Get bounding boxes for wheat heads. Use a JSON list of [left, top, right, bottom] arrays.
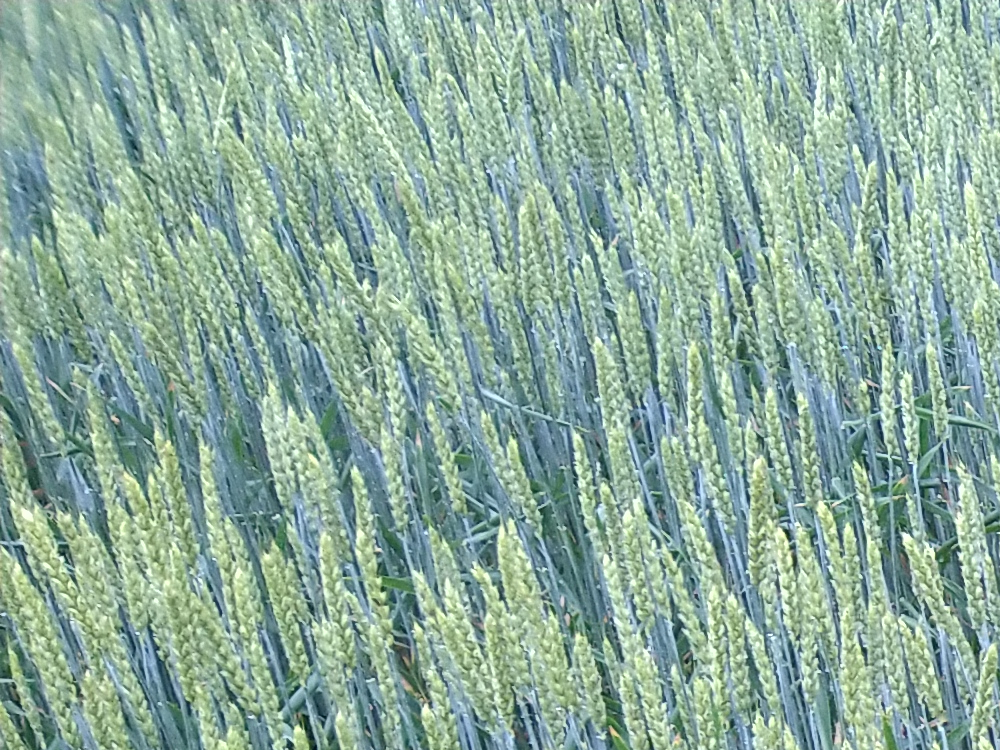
[[614, 421, 644, 508], [372, 349, 385, 410], [607, 242, 623, 287], [638, 177, 654, 215], [889, 242, 915, 331], [564, 17, 576, 86], [88, 122, 119, 201], [882, 616, 911, 718], [608, 356, 628, 422], [951, 241, 970, 312], [195, 688, 224, 750], [339, 305, 369, 381], [72, 87, 89, 167], [19, 0, 40, 52], [830, 223, 858, 303], [550, 81, 574, 157], [923, 167, 939, 223], [507, 440, 543, 534], [207, 319, 230, 356], [835, 20, 856, 71], [937, 65, 947, 104], [308, 281, 329, 342], [707, 143, 729, 199], [243, 257, 258, 311], [333, 232, 355, 272], [301, 175, 316, 227], [121, 85, 151, 157], [85, 379, 118, 457], [889, 168, 912, 249], [354, 466, 374, 549], [753, 289, 779, 375], [759, 94, 768, 127], [723, 0, 738, 53], [698, 422, 733, 525], [676, 504, 700, 585], [523, 41, 548, 118], [867, 541, 889, 614], [410, 54, 423, 102], [335, 713, 363, 750], [601, 33, 618, 76], [593, 0, 607, 33], [394, 172, 422, 221], [265, 104, 296, 170], [103, 13, 125, 67], [773, 529, 798, 636], [709, 295, 724, 381], [622, 171, 637, 207], [660, 434, 678, 502], [378, 343, 408, 437], [223, 122, 276, 211], [726, 599, 752, 718], [506, 0, 522, 30], [185, 0, 213, 64], [607, 415, 631, 511], [2, 581, 34, 662], [458, 199, 481, 292], [188, 73, 216, 143], [659, 286, 675, 405], [299, 0, 321, 47], [172, 232, 210, 317], [757, 180, 770, 238], [332, 339, 349, 378], [577, 104, 603, 181], [375, 22, 391, 64], [304, 412, 338, 483], [214, 227, 249, 293], [266, 19, 279, 48], [899, 0, 916, 21], [50, 74, 75, 130], [381, 429, 408, 528], [818, 67, 827, 132], [473, 566, 502, 614], [679, 124, 697, 186], [148, 477, 171, 564], [391, 232, 413, 298], [789, 112, 800, 158], [52, 115, 91, 210], [241, 39, 266, 96], [901, 534, 944, 623], [167, 24, 193, 109], [213, 56, 242, 145], [643, 0, 668, 52], [83, 248, 115, 327], [420, 17, 444, 54], [855, 648, 885, 736], [590, 339, 623, 430], [956, 27, 978, 87], [798, 394, 822, 502], [53, 211, 91, 323], [817, 503, 851, 607], [296, 93, 320, 172], [226, 517, 264, 622], [928, 346, 948, 437], [881, 346, 899, 456], [55, 11, 75, 67], [543, 0, 562, 42], [392, 37, 407, 91], [583, 253, 606, 331], [748, 410, 758, 435], [925, 112, 937, 171], [92, 680, 146, 750], [200, 444, 232, 581], [909, 68, 923, 143], [341, 155, 362, 206], [191, 631, 220, 680], [955, 515, 986, 626], [646, 29, 661, 92], [159, 440, 198, 557], [422, 78, 431, 105], [852, 142, 881, 221], [414, 624, 448, 717], [811, 585, 839, 659], [234, 67, 261, 128], [370, 628, 402, 731], [479, 220, 501, 307], [572, 434, 595, 503], [957, 469, 985, 549], [877, 0, 895, 47], [906, 27, 926, 82], [360, 141, 376, 189], [534, 184, 575, 300], [768, 9, 789, 68], [636, 656, 672, 750], [352, 84, 362, 142], [632, 0, 645, 31], [518, 208, 537, 309], [69, 152, 101, 220], [176, 3, 190, 44], [689, 180, 709, 267], [540, 111, 554, 157], [481, 414, 518, 506], [411, 571, 440, 643], [926, 212, 955, 305], [201, 134, 230, 195], [318, 119, 341, 184], [900, 619, 928, 701], [316, 341, 366, 434], [742, 73, 760, 157], [719, 293, 734, 353], [605, 0, 619, 34], [559, 79, 585, 159], [59, 515, 118, 619], [665, 104, 682, 164], [943, 134, 963, 209], [754, 254, 771, 296], [107, 632, 162, 750], [376, 150, 394, 210], [804, 133, 816, 182], [484, 605, 512, 723], [299, 500, 325, 552], [384, 0, 412, 49], [427, 0, 446, 37], [430, 221, 451, 299], [428, 69, 450, 174], [233, 326, 260, 397], [875, 62, 891, 148], [558, 0, 584, 29], [291, 12, 313, 77], [584, 1, 597, 56], [731, 193, 745, 234], [786, 34, 804, 84], [459, 0, 475, 19], [819, 133, 836, 203], [97, 235, 131, 315], [456, 12, 474, 65], [901, 374, 920, 460], [405, 0, 424, 40], [467, 74, 494, 175], [428, 44, 438, 83], [956, 658, 970, 703], [975, 304, 995, 400], [746, 620, 782, 716], [239, 120, 259, 163], [604, 182, 630, 256], [288, 202, 321, 270], [510, 524, 545, 606], [105, 202, 132, 255], [967, 0, 987, 40], [91, 99, 107, 142], [793, 270, 814, 364], [865, 58, 881, 129], [697, 12, 720, 85], [673, 309, 683, 370], [147, 578, 191, 697], [220, 137, 232, 191], [783, 109, 793, 158], [721, 373, 742, 463], [900, 138, 920, 187], [621, 521, 655, 623], [281, 92, 300, 139], [341, 16, 353, 50], [601, 559, 640, 665], [866, 610, 892, 703], [126, 257, 173, 347], [773, 75, 782, 119], [792, 0, 814, 76], [336, 182, 364, 249], [942, 114, 954, 165], [697, 62, 716, 128], [121, 212, 153, 289], [115, 174, 164, 250], [750, 716, 767, 750], [452, 97, 490, 196], [683, 504, 726, 596], [632, 215, 654, 285], [331, 252, 399, 354], [831, 76, 852, 173], [759, 41, 766, 90], [21, 510, 91, 621], [572, 28, 601, 97], [141, 13, 169, 106], [795, 162, 820, 255], [159, 256, 188, 341], [968, 125, 991, 181], [247, 635, 282, 747], [555, 0, 567, 39], [607, 97, 642, 178], [810, 251, 852, 346], [814, 295, 837, 391], [907, 500, 921, 539], [506, 526, 528, 608], [506, 307, 535, 405], [91, 434, 120, 553], [912, 178, 926, 214], [427, 168, 441, 214], [330, 61, 357, 141], [426, 526, 471, 610], [599, 486, 627, 591], [575, 266, 592, 343], [86, 62, 110, 117], [762, 172, 784, 254], [476, 50, 511, 159], [141, 582, 185, 674], [107, 110, 131, 172], [572, 0, 584, 33], [662, 552, 707, 662], [472, 311, 499, 394], [313, 161, 332, 243], [621, 0, 639, 43], [179, 80, 194, 117], [270, 385, 289, 449], [705, 584, 728, 717], [0, 177, 11, 225], [67, 212, 100, 273], [548, 608, 567, 668], [22, 64, 47, 120], [357, 56, 384, 114], [233, 571, 258, 654], [0, 414, 39, 507], [262, 554, 309, 682], [939, 0, 956, 34], [656, 109, 668, 165], [708, 0, 727, 46], [781, 7, 791, 51], [158, 114, 195, 205], [591, 228, 621, 304], [149, 154, 174, 228], [910, 245, 937, 340], [79, 513, 104, 578], [615, 305, 641, 392], [357, 536, 392, 639], [264, 39, 284, 72], [41, 146, 75, 211], [186, 41, 220, 124], [490, 0, 515, 56], [527, 7, 546, 67], [0, 268, 24, 331], [146, 251, 163, 293], [224, 1, 247, 36], [852, 462, 881, 545], [703, 164, 721, 259], [583, 500, 607, 564], [633, 507, 669, 614], [990, 83, 1000, 137], [266, 131, 296, 200], [9, 563, 78, 707], [529, 645, 565, 744], [962, 182, 990, 284], [192, 213, 236, 326], [725, 251, 757, 354], [672, 194, 694, 279], [759, 457, 778, 513], [796, 528, 835, 651], [164, 577, 207, 681], [261, 400, 296, 510], [431, 345, 461, 400], [319, 534, 354, 663], [288, 408, 314, 495], [91, 21, 124, 76], [348, 4, 371, 52], [90, 75, 124, 142], [441, 5, 462, 74], [619, 676, 654, 750], [437, 284, 472, 390], [358, 104, 411, 190], [407, 233, 429, 292], [243, 134, 276, 217], [768, 248, 799, 345], [760, 568, 784, 638], [200, 0, 219, 33], [679, 27, 695, 88], [765, 389, 791, 486], [169, 109, 208, 201], [525, 106, 538, 147], [289, 560, 310, 618], [289, 28, 313, 83], [320, 265, 339, 326], [184, 594, 258, 707], [35, 648, 94, 750], [974, 27, 990, 89], [439, 615, 483, 709], [7, 498, 42, 580], [491, 199, 514, 294], [850, 0, 873, 44], [315, 50, 325, 97], [98, 531, 131, 611], [748, 458, 769, 585], [240, 109, 275, 172], [850, 46, 874, 140], [121, 23, 156, 109], [124, 272, 145, 327], [445, 216, 470, 282], [476, 26, 509, 95], [859, 242, 888, 348], [12, 341, 65, 447], [972, 646, 999, 736], [268, 536, 289, 577], [165, 154, 187, 209], [72, 7, 101, 77], [710, 42, 734, 98], [720, 145, 756, 237], [610, 331, 623, 384], [686, 1, 701, 17], [537, 323, 563, 422], [339, 62, 360, 99], [802, 612, 818, 701], [29, 235, 60, 330], [208, 344, 232, 413], [261, 269, 290, 328], [946, 68, 961, 117], [843, 524, 863, 607], [10, 254, 43, 328], [748, 417, 762, 479], [71, 77, 82, 96], [624, 78, 647, 150], [373, 44, 393, 99], [988, 131, 1000, 192], [683, 86, 706, 155], [989, 457, 1000, 534], [889, 59, 904, 119], [744, 0, 760, 52], [626, 294, 652, 391], [0, 703, 32, 750], [235, 211, 251, 261], [871, 1, 883, 43], [670, 436, 693, 503], [777, 144, 791, 184], [508, 37, 523, 111], [284, 37, 299, 95], [694, 681, 717, 750], [643, 111, 662, 184], [115, 473, 161, 567], [221, 28, 261, 119], [240, 0, 263, 36], [676, 267, 702, 345], [689, 347, 702, 456], [185, 304, 209, 397], [986, 0, 1000, 42], [362, 188, 391, 253], [242, 195, 270, 265], [283, 309, 300, 380], [44, 232, 97, 359], [8, 647, 44, 743], [670, 0, 693, 29], [222, 567, 240, 647], [444, 100, 462, 148], [554, 179, 586, 252], [312, 624, 351, 714], [607, 35, 630, 61], [574, 635, 606, 729], [838, 614, 854, 725], [854, 162, 881, 255], [109, 334, 158, 417], [508, 622, 533, 690], [740, 118, 757, 178], [233, 171, 251, 212], [322, 0, 339, 42], [720, 112, 734, 154], [448, 264, 477, 336], [592, 107, 613, 180], [412, 327, 446, 410], [652, 212, 668, 257], [519, 133, 540, 184], [552, 124, 566, 167], [738, 18, 756, 72], [794, 168, 816, 246], [440, 54, 447, 72], [758, 0, 782, 63], [911, 208, 935, 276], [189, 234, 219, 297], [421, 706, 458, 750], [974, 173, 996, 246], [762, 133, 776, 172], [982, 552, 1000, 632], [394, 93, 426, 157], [304, 460, 344, 542], [524, 193, 554, 284], [265, 231, 318, 338], [844, 369, 870, 412], [944, 611, 980, 695], [914, 622, 946, 719], [820, 0, 840, 66], [445, 587, 487, 690], [269, 385, 294, 486], [668, 37, 684, 99], [427, 404, 465, 513], [140, 323, 200, 404], [245, 309, 277, 383], [911, 0, 929, 32], [295, 132, 311, 180], [70, 614, 109, 684], [110, 513, 148, 629]]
